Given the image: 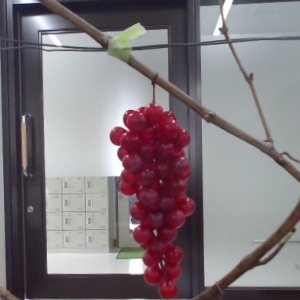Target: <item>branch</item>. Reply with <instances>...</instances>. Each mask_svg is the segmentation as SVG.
Returning a JSON list of instances; mask_svg holds the SVG:
<instances>
[{
	"label": "branch",
	"instance_id": "obj_1",
	"mask_svg": "<svg viewBox=\"0 0 300 300\" xmlns=\"http://www.w3.org/2000/svg\"><path fill=\"white\" fill-rule=\"evenodd\" d=\"M220 3V15L222 19V27H218L219 32L223 35L228 43V47H230V51L232 52L233 58L237 65L239 66L240 72L243 74L244 79L250 85L251 92L254 96L256 106L258 108V113L260 116L261 125L265 131V141L261 142L257 138L249 136V134L239 126L232 125L231 122L228 120L219 117L215 112L209 109L207 106H204L191 96L190 94L182 91L177 87L176 84L168 80L164 74L153 70L147 63L139 60L134 55H129V61L126 65H129L131 68L135 69L139 73H141L144 77L148 78L149 80L155 82L157 86L164 89L168 95L173 96L178 101L184 103L188 108L195 111L196 114L201 117L203 120L211 123L217 127L222 128L227 133L231 134L238 139L251 144L254 146L258 151H261L264 155L270 156L284 171H286L294 180H297L300 183V173L296 170V168L292 165V163L286 160V155L292 162L300 164V160L295 159L289 152H279L277 149L274 148V140L271 133L270 128L267 126L263 110L260 106L257 94L255 92L252 80H253V73L247 74L245 68L242 66L241 62L239 61L236 52L234 50L233 44L230 41L228 36V25L226 22V18L223 12V0H219Z\"/></svg>",
	"mask_w": 300,
	"mask_h": 300
},
{
	"label": "branch",
	"instance_id": "obj_2",
	"mask_svg": "<svg viewBox=\"0 0 300 300\" xmlns=\"http://www.w3.org/2000/svg\"><path fill=\"white\" fill-rule=\"evenodd\" d=\"M299 220L300 200H298L295 208L285 218V221L277 227L266 241L262 242L254 251L248 253L241 262L238 263V265L230 269L221 279L210 284L203 292L196 294L192 300H215L223 295L226 288L238 280L244 273L251 271L259 265H265L272 261L280 249L289 242L290 238L295 233L294 227L299 223ZM285 236H287V238L282 242V244H279L270 256L260 261V259L271 252L277 243Z\"/></svg>",
	"mask_w": 300,
	"mask_h": 300
},
{
	"label": "branch",
	"instance_id": "obj_3",
	"mask_svg": "<svg viewBox=\"0 0 300 300\" xmlns=\"http://www.w3.org/2000/svg\"><path fill=\"white\" fill-rule=\"evenodd\" d=\"M38 2L42 5L47 6L59 16L65 18L68 22L75 25L76 28L83 30L88 34V36L96 41L100 45V47L108 50L109 42L111 43L113 38L108 36L107 34H104L100 29L93 26L89 21H86L82 17L76 15L57 0H38Z\"/></svg>",
	"mask_w": 300,
	"mask_h": 300
}]
</instances>
